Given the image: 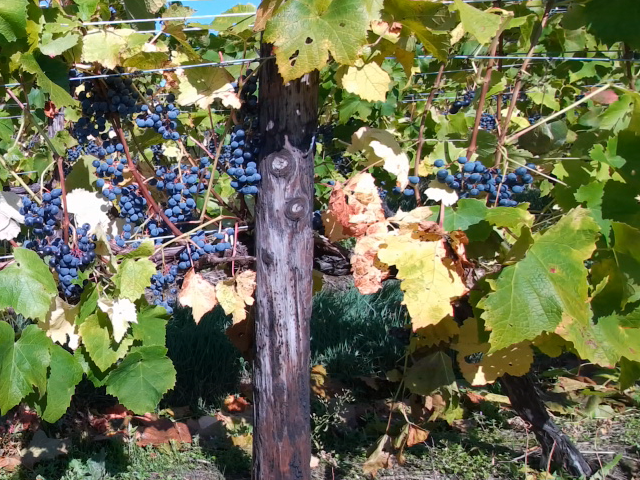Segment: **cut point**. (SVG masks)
<instances>
[{"instance_id": "6a23745f", "label": "cut point", "mask_w": 640, "mask_h": 480, "mask_svg": "<svg viewBox=\"0 0 640 480\" xmlns=\"http://www.w3.org/2000/svg\"><path fill=\"white\" fill-rule=\"evenodd\" d=\"M56 162H57V161H56V159H54V160H52L50 163H48V164L44 167L43 172H42L41 177H40V181H43L44 176H45V174H46V172H47L48 168H49V167H51V166H52L53 164H55Z\"/></svg>"}, {"instance_id": "7d7e1d6f", "label": "cut point", "mask_w": 640, "mask_h": 480, "mask_svg": "<svg viewBox=\"0 0 640 480\" xmlns=\"http://www.w3.org/2000/svg\"><path fill=\"white\" fill-rule=\"evenodd\" d=\"M182 156H183V153L180 150V153H179V156H178V159H177V175L178 176L182 175V171H181V167H180V161H181Z\"/></svg>"}]
</instances>
